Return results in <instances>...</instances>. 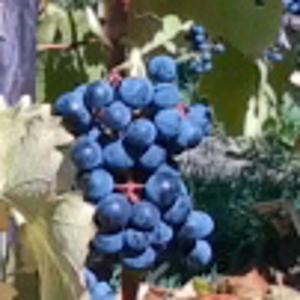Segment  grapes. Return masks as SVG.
<instances>
[{
	"label": "grapes",
	"mask_w": 300,
	"mask_h": 300,
	"mask_svg": "<svg viewBox=\"0 0 300 300\" xmlns=\"http://www.w3.org/2000/svg\"><path fill=\"white\" fill-rule=\"evenodd\" d=\"M150 78H126L105 68L100 80L77 85L54 100V113L69 118L78 134L69 162L80 172L82 200L94 204L101 229L90 239L96 255H115L133 271H150L174 242L183 249L176 268L206 273L216 260L209 241L216 220L193 209L185 178L168 157L194 149L210 133L211 109L202 102L181 117L177 63L169 55L149 61Z\"/></svg>",
	"instance_id": "01657485"
},
{
	"label": "grapes",
	"mask_w": 300,
	"mask_h": 300,
	"mask_svg": "<svg viewBox=\"0 0 300 300\" xmlns=\"http://www.w3.org/2000/svg\"><path fill=\"white\" fill-rule=\"evenodd\" d=\"M80 275L91 300H116V290L108 281H100L97 274L89 267H83Z\"/></svg>",
	"instance_id": "b958b902"
}]
</instances>
